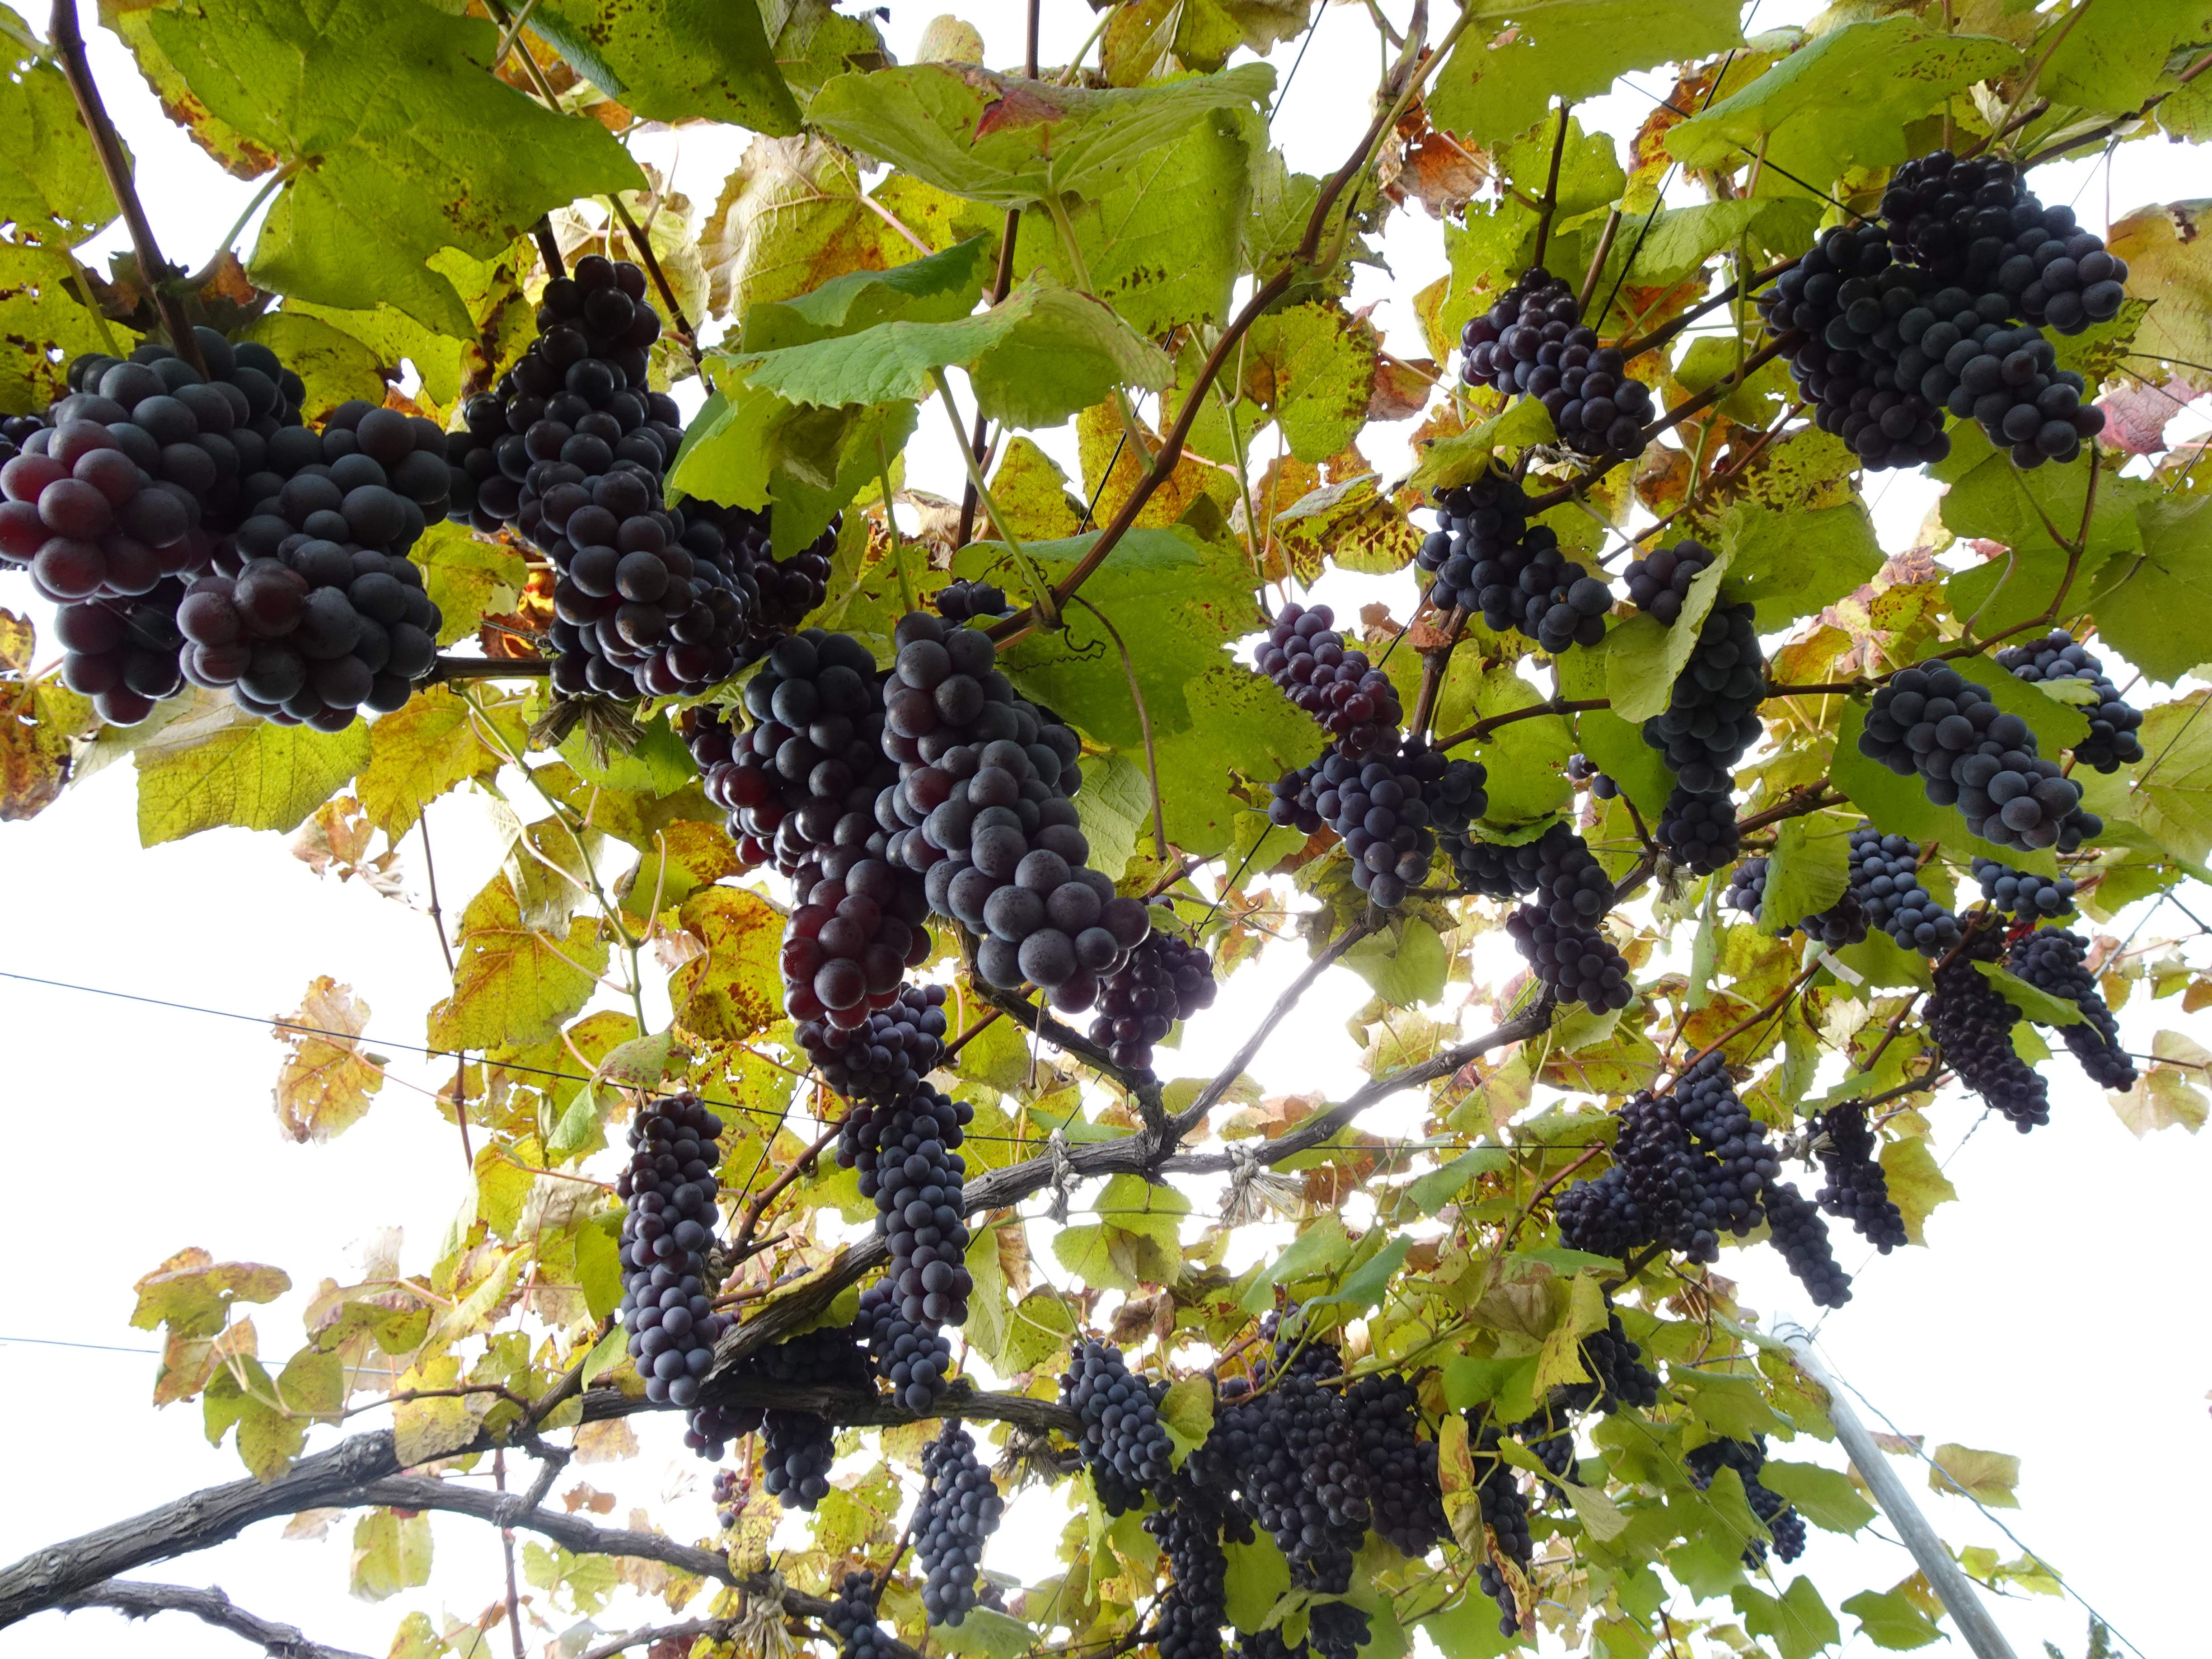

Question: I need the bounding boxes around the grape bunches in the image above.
[1550,1174,1660,1263]
[681,1359,766,1465]
[1260,1301,1348,1374]
[1565,745,1626,804]
[1462,1409,1536,1578]
[787,985,949,1110]
[1953,912,2011,965]
[1712,1183,1769,1247]
[756,1328,880,1391]
[1671,1050,1780,1200]
[504,280,680,603]
[909,1420,1006,1628]
[1088,894,1218,1072]
[178,397,454,736]
[1775,223,1900,367]
[712,1469,743,1532]
[1311,1602,1374,1659]
[1684,1432,1766,1490]
[761,1405,837,1518]
[1154,1589,1223,1659]
[1079,1433,1154,1519]
[551,478,761,701]
[1333,1374,1422,1444]
[1920,956,2055,1136]
[1217,1372,1352,1598]
[1312,755,1436,906]
[2006,925,2144,1096]
[1066,1343,1174,1485]
[1856,655,2100,854]
[1234,1613,1311,1659]
[1835,828,1963,956]
[1251,600,1404,763]
[1653,773,1745,883]
[688,726,933,1033]
[850,1281,957,1416]
[52,582,187,729]
[1874,145,2128,340]
[1474,1556,1526,1643]
[1738,1457,1808,1573]
[1637,692,1773,789]
[1183,1422,1253,1542]
[820,1569,898,1659]
[1506,901,1637,1020]
[1827,269,2112,475]
[1439,806,1618,930]
[1602,1316,1662,1407]
[1763,1182,1855,1310]
[1721,848,1870,945]
[1969,845,2084,927]
[1991,624,2147,778]
[1417,456,1618,654]
[1520,1400,1591,1507]
[1553,1329,1618,1416]
[1818,1156,1911,1258]
[741,500,845,654]
[446,372,514,536]
[1608,1091,1723,1268]
[743,627,884,801]
[1804,1097,1879,1165]
[932,579,1010,620]
[1401,734,1490,832]
[1144,1470,1226,1634]
[613,1090,735,1409]
[874,609,1158,1018]
[836,1082,976,1334]
[1755,268,1951,472]
[1624,539,1765,699]
[0,325,311,602]
[1273,1374,1372,1551]
[1271,761,1325,840]
[1456,263,1659,463]
[1364,1434,1444,1564]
